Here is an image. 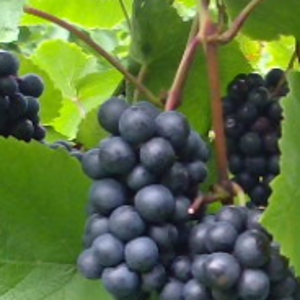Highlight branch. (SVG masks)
Wrapping results in <instances>:
<instances>
[{"label":"branch","mask_w":300,"mask_h":300,"mask_svg":"<svg viewBox=\"0 0 300 300\" xmlns=\"http://www.w3.org/2000/svg\"><path fill=\"white\" fill-rule=\"evenodd\" d=\"M264 5V0H251L237 15L233 22L227 26V3L219 0L216 3V21L211 28L209 19V2H198V23L200 34L194 35L188 47L182 52L180 62L176 67L171 80L170 89L162 93L154 94L148 87L138 81L122 63L114 60L112 56L105 54L101 47L83 31L77 30L59 20L55 16L34 7H27L26 11L49 19L53 23L66 29L70 33L80 36L90 43L104 60L122 70L126 77L144 91L157 104L164 113H172L176 107L184 103L183 91L186 87L190 68L197 55V47L203 41L206 66L210 75L211 103L210 108L214 115V159L218 170V186L220 193L210 197H203L187 207V215L192 216L200 208L207 206L231 207L234 204L231 184L229 182V166L225 151V111L222 107L221 71L217 61L215 45L226 46L230 40L244 27L249 18Z\"/></svg>","instance_id":"branch-1"}]
</instances>
